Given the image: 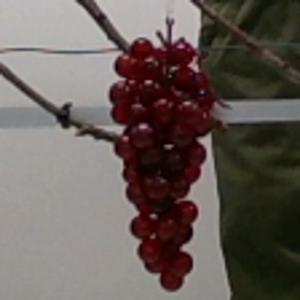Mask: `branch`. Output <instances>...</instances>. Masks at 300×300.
<instances>
[{
	"instance_id": "branch-1",
	"label": "branch",
	"mask_w": 300,
	"mask_h": 300,
	"mask_svg": "<svg viewBox=\"0 0 300 300\" xmlns=\"http://www.w3.org/2000/svg\"><path fill=\"white\" fill-rule=\"evenodd\" d=\"M0 76L23 97L34 105L44 110L54 118L56 124H60L62 130L75 128L74 137L91 136L94 142L104 141L113 146L114 141L121 134L116 131H107L105 128L97 127L95 123L85 122L73 113L74 104L72 101H65L61 106L51 102L46 97L22 80L18 74L12 71L3 61L0 60Z\"/></svg>"
},
{
	"instance_id": "branch-2",
	"label": "branch",
	"mask_w": 300,
	"mask_h": 300,
	"mask_svg": "<svg viewBox=\"0 0 300 300\" xmlns=\"http://www.w3.org/2000/svg\"><path fill=\"white\" fill-rule=\"evenodd\" d=\"M195 8L205 12L209 17L217 21L229 33L234 35L238 40L242 41L246 46L263 58L264 62L272 64L279 69L282 74L295 85L300 87V73L288 66L283 60L276 56L271 50L262 47L253 38L245 34L241 29L237 28L231 21L227 20L222 14L212 7L206 0H189Z\"/></svg>"
},
{
	"instance_id": "branch-3",
	"label": "branch",
	"mask_w": 300,
	"mask_h": 300,
	"mask_svg": "<svg viewBox=\"0 0 300 300\" xmlns=\"http://www.w3.org/2000/svg\"><path fill=\"white\" fill-rule=\"evenodd\" d=\"M74 2L85 10L86 14L104 33L108 42H112L118 50L128 52V41L121 35L116 26L109 19V16H107L104 10L98 5L96 0H74Z\"/></svg>"
}]
</instances>
